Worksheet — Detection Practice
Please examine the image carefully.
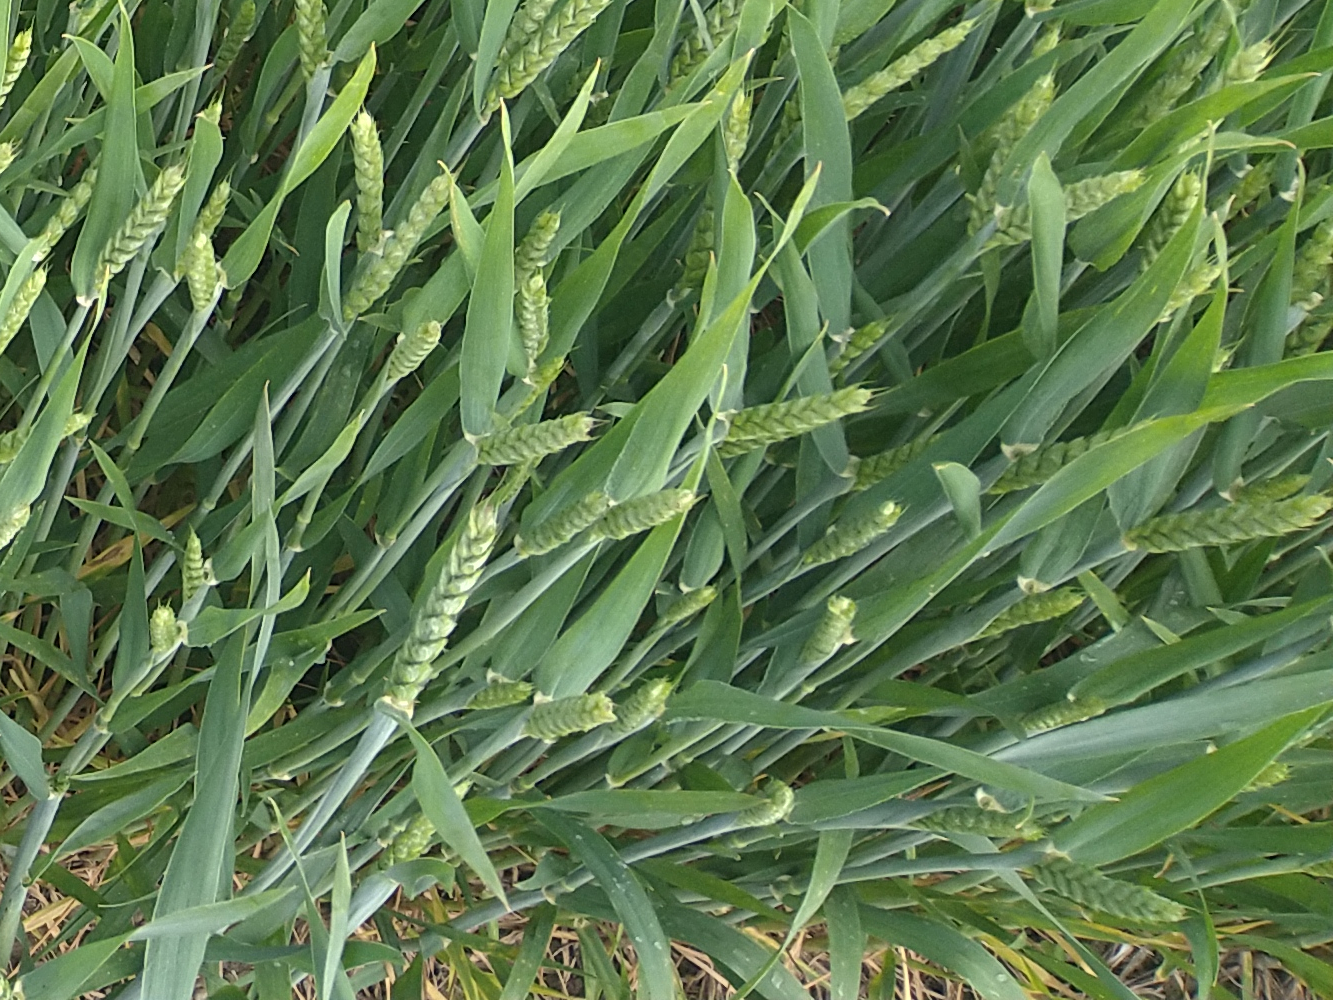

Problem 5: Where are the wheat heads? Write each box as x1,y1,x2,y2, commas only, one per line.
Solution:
805,598,859,664
1092,0,1236,146
1291,225,1327,302
839,20,969,117
41,149,102,248
669,0,807,80
506,355,566,416
1138,172,1202,275
520,265,550,358
1022,850,1182,924
524,492,605,555
344,172,454,317
1237,473,1311,505
1242,759,1289,789
597,485,692,539
913,802,1040,839
493,0,577,58
511,216,560,291
744,781,794,826
94,169,188,291
185,235,220,312
0,28,33,113
488,455,539,514
967,592,1088,638
195,179,233,240
853,442,930,486
152,603,179,652
498,0,644,91
760,81,811,170
715,424,818,458
681,180,716,279
213,0,258,77
1124,492,1333,553
1181,46,1272,151
473,410,591,464
525,693,616,736
1158,258,1215,319
607,679,672,737
292,0,328,69
1204,164,1271,221
797,503,902,574
662,583,714,622
0,268,49,373
353,114,386,256
1019,701,1099,734
830,320,887,379
714,387,868,435
0,950,18,1000
0,503,33,551
388,322,441,380
1281,310,1326,357
465,683,532,708
990,427,1158,490
723,92,753,174
983,170,1157,244
972,77,1057,235
1018,29,1059,88
0,414,91,467
377,784,467,871
185,534,204,608
387,503,502,707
